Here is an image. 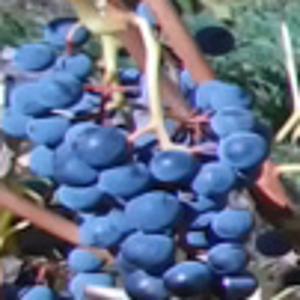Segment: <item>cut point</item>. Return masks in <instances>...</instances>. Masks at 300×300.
Segmentation results:
<instances>
[{
    "label": "cut point",
    "mask_w": 300,
    "mask_h": 300,
    "mask_svg": "<svg viewBox=\"0 0 300 300\" xmlns=\"http://www.w3.org/2000/svg\"><path fill=\"white\" fill-rule=\"evenodd\" d=\"M123 20L127 23H133L137 28H139L141 35L145 39L143 41V46L146 51L144 53V60L146 63L145 74L147 75L151 118L156 127H162L164 103L158 72L161 57L160 43L154 38L148 23L138 14L125 13L123 15Z\"/></svg>",
    "instance_id": "cut-point-1"
}]
</instances>
